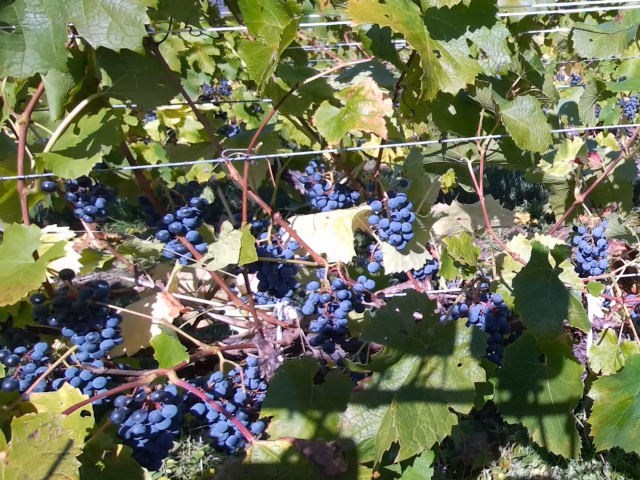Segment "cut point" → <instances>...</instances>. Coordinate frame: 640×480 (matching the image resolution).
Returning a JSON list of instances; mask_svg holds the SVG:
<instances>
[{
  "instance_id": "6a23745f",
  "label": "cut point",
  "mask_w": 640,
  "mask_h": 480,
  "mask_svg": "<svg viewBox=\"0 0 640 480\" xmlns=\"http://www.w3.org/2000/svg\"><path fill=\"white\" fill-rule=\"evenodd\" d=\"M216 356L219 358V366L223 367L224 363H227L229 365H231L232 367H236L237 363L234 362L232 359L229 358H224V355L221 353V351H215Z\"/></svg>"
},
{
  "instance_id": "7d7e1d6f",
  "label": "cut point",
  "mask_w": 640,
  "mask_h": 480,
  "mask_svg": "<svg viewBox=\"0 0 640 480\" xmlns=\"http://www.w3.org/2000/svg\"><path fill=\"white\" fill-rule=\"evenodd\" d=\"M149 181H150L151 184H155V185L161 187L164 190L166 197L170 196V189L168 188V186L164 182L159 181L157 178H151V179H149Z\"/></svg>"
},
{
  "instance_id": "deb38ca7",
  "label": "cut point",
  "mask_w": 640,
  "mask_h": 480,
  "mask_svg": "<svg viewBox=\"0 0 640 480\" xmlns=\"http://www.w3.org/2000/svg\"><path fill=\"white\" fill-rule=\"evenodd\" d=\"M338 164L337 160H333L332 163L330 164V169L329 171L325 172V175L328 176L329 178H332L334 176V172H335V167Z\"/></svg>"
},
{
  "instance_id": "40658cd0",
  "label": "cut point",
  "mask_w": 640,
  "mask_h": 480,
  "mask_svg": "<svg viewBox=\"0 0 640 480\" xmlns=\"http://www.w3.org/2000/svg\"><path fill=\"white\" fill-rule=\"evenodd\" d=\"M579 205L584 209V211H585L586 215L588 216V218L590 220H593L594 219V215L592 214L590 208L585 204V202L582 201Z\"/></svg>"
},
{
  "instance_id": "1e8049ac",
  "label": "cut point",
  "mask_w": 640,
  "mask_h": 480,
  "mask_svg": "<svg viewBox=\"0 0 640 480\" xmlns=\"http://www.w3.org/2000/svg\"><path fill=\"white\" fill-rule=\"evenodd\" d=\"M376 185L378 186V188L382 192L383 196L387 197L388 191L386 190V188L384 187V185L382 184L380 179L376 180Z\"/></svg>"
}]
</instances>
